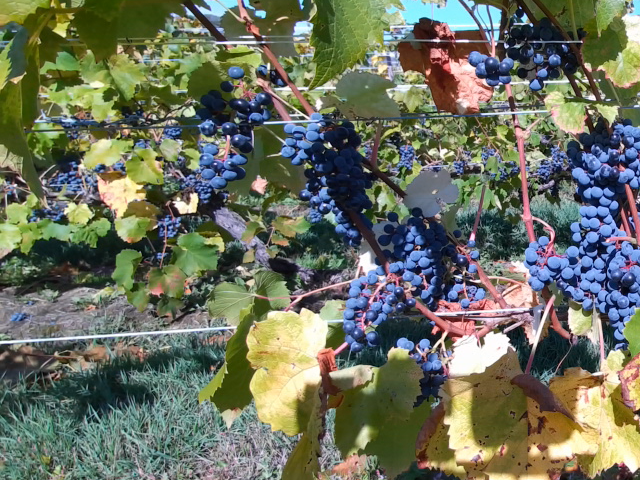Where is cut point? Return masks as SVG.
Wrapping results in <instances>:
<instances>
[{
	"instance_id": "1",
	"label": "cut point",
	"mask_w": 640,
	"mask_h": 480,
	"mask_svg": "<svg viewBox=\"0 0 640 480\" xmlns=\"http://www.w3.org/2000/svg\"><path fill=\"white\" fill-rule=\"evenodd\" d=\"M531 217L533 219V222L540 223L545 229H547L549 231L551 239H555L556 238L555 231H554V228H553L552 225L546 223L544 219L536 217L533 214H531Z\"/></svg>"
}]
</instances>
